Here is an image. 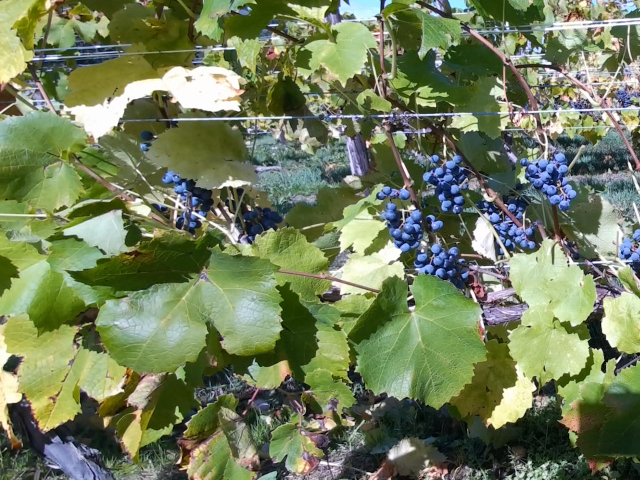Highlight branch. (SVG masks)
<instances>
[{
  "instance_id": "ca6c30ca",
  "label": "branch",
  "mask_w": 640,
  "mask_h": 480,
  "mask_svg": "<svg viewBox=\"0 0 640 480\" xmlns=\"http://www.w3.org/2000/svg\"><path fill=\"white\" fill-rule=\"evenodd\" d=\"M27 68L32 73L33 77L35 78V81H36L37 87L39 89L40 95H41L42 99L44 100V102L46 103V105L48 106V109H49L50 113L51 114H56L57 110L54 109L53 104L51 103V101L47 97L46 92L44 90L43 84L41 82V79H40V76H39L37 70L33 67V65L31 63L27 64Z\"/></svg>"
},
{
  "instance_id": "2b1400db",
  "label": "branch",
  "mask_w": 640,
  "mask_h": 480,
  "mask_svg": "<svg viewBox=\"0 0 640 480\" xmlns=\"http://www.w3.org/2000/svg\"><path fill=\"white\" fill-rule=\"evenodd\" d=\"M552 223H553V229H554V234H555V240L557 242H560L561 241V237H560V232H559V227H558L557 208L556 207L552 208Z\"/></svg>"
},
{
  "instance_id": "45aa463d",
  "label": "branch",
  "mask_w": 640,
  "mask_h": 480,
  "mask_svg": "<svg viewBox=\"0 0 640 480\" xmlns=\"http://www.w3.org/2000/svg\"><path fill=\"white\" fill-rule=\"evenodd\" d=\"M382 130H383V133H384V137H385L386 140H388L389 146L391 148V151L394 154L395 163H396V167H397V169L399 171V174L401 175L403 181L406 183L408 191L410 192L412 205L415 208H418L419 204H418L417 199H416V193H415V190H414L411 182L409 181V179H408V177L406 175V172L404 171V169L402 167L400 156H399V152L396 149V146H395V143H394V140H393L392 128H391L389 119H384V123L382 124Z\"/></svg>"
},
{
  "instance_id": "ea751061",
  "label": "branch",
  "mask_w": 640,
  "mask_h": 480,
  "mask_svg": "<svg viewBox=\"0 0 640 480\" xmlns=\"http://www.w3.org/2000/svg\"><path fill=\"white\" fill-rule=\"evenodd\" d=\"M607 117L609 118V120L613 123V125L617 129V131L619 133V136H620V139L623 142V146L626 147L629 150L630 155H631V157L633 159L634 166L638 170H640V163L638 161V157L636 155L635 149L628 143V140L626 139V136L624 134L623 128L621 127L619 122L614 118V115L611 112L607 113Z\"/></svg>"
},
{
  "instance_id": "30e6481e",
  "label": "branch",
  "mask_w": 640,
  "mask_h": 480,
  "mask_svg": "<svg viewBox=\"0 0 640 480\" xmlns=\"http://www.w3.org/2000/svg\"><path fill=\"white\" fill-rule=\"evenodd\" d=\"M461 28L467 33H470L471 35H473V37L476 40L480 41L482 44L487 46L498 57L502 58L508 64V67L512 70L514 75L517 77V80L519 81L520 85L522 86L523 89H525L526 93L528 94L531 108L533 111L539 110V107L537 106V101L534 98L532 90L526 84V82L522 78L521 73L518 71L519 69H551V70L562 72L568 77H570V80L573 81L581 90H583L592 101L598 103L601 107L605 106L604 101L596 97L583 83H581L577 78H575V75L572 72H570L568 69L561 66L553 65V64H517L514 66L511 59H509L504 53L498 50L487 39L479 35L474 29L468 27L466 24H462Z\"/></svg>"
},
{
  "instance_id": "170604dd",
  "label": "branch",
  "mask_w": 640,
  "mask_h": 480,
  "mask_svg": "<svg viewBox=\"0 0 640 480\" xmlns=\"http://www.w3.org/2000/svg\"><path fill=\"white\" fill-rule=\"evenodd\" d=\"M378 48H379V61H380V81L382 87L381 98L390 102L392 105L400 107L402 110L411 113L412 109L406 106L404 103L396 101L387 94V79L385 78V59H384V46H383V21H378Z\"/></svg>"
},
{
  "instance_id": "a944a4c4",
  "label": "branch",
  "mask_w": 640,
  "mask_h": 480,
  "mask_svg": "<svg viewBox=\"0 0 640 480\" xmlns=\"http://www.w3.org/2000/svg\"><path fill=\"white\" fill-rule=\"evenodd\" d=\"M536 121H537V130H538V139L541 143L545 142L544 136H543V127H542V119L541 116H535Z\"/></svg>"
},
{
  "instance_id": "325d2c04",
  "label": "branch",
  "mask_w": 640,
  "mask_h": 480,
  "mask_svg": "<svg viewBox=\"0 0 640 480\" xmlns=\"http://www.w3.org/2000/svg\"><path fill=\"white\" fill-rule=\"evenodd\" d=\"M420 122L424 126H426L427 128L431 129L435 134H437L439 136H442L444 138V140L446 141V144L448 145L449 149L452 151L453 154L457 153V154L461 155V157L464 159V161L466 162V164L469 167V169L471 170V172L474 174V177L478 180V182L480 183V186L487 193L489 198L492 199V201L494 203L498 204V206L507 214V216L510 218V220L513 221L521 231H524L525 230V226L512 214L510 209L500 200V198L497 196V194L494 192V190L493 189H489L488 185L485 183L483 178L480 176V174L477 171V169L475 168V166L472 165L471 162L468 161L465 158V156L462 154V152L459 150V148L457 146L453 145L452 141L449 139L448 134L445 131H442V130L438 129L435 125L431 124L430 122H428L424 118H421Z\"/></svg>"
},
{
  "instance_id": "1d269e1b",
  "label": "branch",
  "mask_w": 640,
  "mask_h": 480,
  "mask_svg": "<svg viewBox=\"0 0 640 480\" xmlns=\"http://www.w3.org/2000/svg\"><path fill=\"white\" fill-rule=\"evenodd\" d=\"M417 4L419 6H421V7H424L426 9L434 11L435 13H437L439 15H442L443 18H447V19L451 18V15L448 12H446V11L440 9V8H437L435 5L428 4V3H426V2H424L422 0H418Z\"/></svg>"
},
{
  "instance_id": "1af6ec82",
  "label": "branch",
  "mask_w": 640,
  "mask_h": 480,
  "mask_svg": "<svg viewBox=\"0 0 640 480\" xmlns=\"http://www.w3.org/2000/svg\"><path fill=\"white\" fill-rule=\"evenodd\" d=\"M265 29L267 31H269V32L276 33L277 35H280L283 38H286L288 41H290L292 43H296L297 42L296 38L292 37L290 34L286 33L285 31H282V30H280V29H278L276 27H272V26L266 25Z\"/></svg>"
},
{
  "instance_id": "982ccf7c",
  "label": "branch",
  "mask_w": 640,
  "mask_h": 480,
  "mask_svg": "<svg viewBox=\"0 0 640 480\" xmlns=\"http://www.w3.org/2000/svg\"><path fill=\"white\" fill-rule=\"evenodd\" d=\"M278 273L279 274L292 275V276H304V277H310V278L334 281V282L342 284V285H347V286L354 287V288H356L358 290H362L365 293H371V294H377V295L381 294V290L380 289L367 288L364 285H360V284H358L356 282H353V281L344 280V279L338 278L336 276L318 274V273L306 272V271H294V270H289V269H279Z\"/></svg>"
},
{
  "instance_id": "8bde2521",
  "label": "branch",
  "mask_w": 640,
  "mask_h": 480,
  "mask_svg": "<svg viewBox=\"0 0 640 480\" xmlns=\"http://www.w3.org/2000/svg\"><path fill=\"white\" fill-rule=\"evenodd\" d=\"M421 224H422V226H423V227H424V229H425L426 237H427V239H428L429 243H430V244H433V243H434V238H433V236L431 235L430 227H429V225H428V223H427V221H426V219H425V218H422V219H421Z\"/></svg>"
},
{
  "instance_id": "1ff4a987",
  "label": "branch",
  "mask_w": 640,
  "mask_h": 480,
  "mask_svg": "<svg viewBox=\"0 0 640 480\" xmlns=\"http://www.w3.org/2000/svg\"><path fill=\"white\" fill-rule=\"evenodd\" d=\"M71 158L73 159L75 165L82 169L83 171H85L91 178L95 179L96 181H98L103 187H105L106 189H108L110 192H112L113 194L127 200L129 203L133 202V198L121 191H119L118 189L112 187L110 184H108L105 180H103L100 176H98L97 174H95L91 169H89L87 166H85L84 164H82L77 155L76 154H72Z\"/></svg>"
}]
</instances>
